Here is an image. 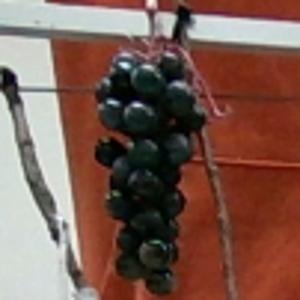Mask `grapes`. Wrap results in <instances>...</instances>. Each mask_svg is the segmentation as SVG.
<instances>
[{
  "label": "grapes",
  "mask_w": 300,
  "mask_h": 300,
  "mask_svg": "<svg viewBox=\"0 0 300 300\" xmlns=\"http://www.w3.org/2000/svg\"><path fill=\"white\" fill-rule=\"evenodd\" d=\"M195 73L181 55L139 50L113 54L108 74L94 81L97 120L124 145L103 136L93 146L97 166L111 171L103 210L115 222L113 267L128 284L144 281L148 294L164 299L176 291L182 260L178 218L188 205L183 166L196 154L194 137L209 128L212 115L194 85Z\"/></svg>",
  "instance_id": "01657485"
}]
</instances>
